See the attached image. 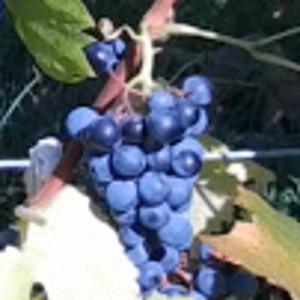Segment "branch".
<instances>
[{
	"mask_svg": "<svg viewBox=\"0 0 300 300\" xmlns=\"http://www.w3.org/2000/svg\"><path fill=\"white\" fill-rule=\"evenodd\" d=\"M175 12V0H152L122 58L95 94L94 106L99 112L108 113L114 108L116 93L124 91L142 67L140 50L143 42L149 40L153 46L156 38L168 29Z\"/></svg>",
	"mask_w": 300,
	"mask_h": 300,
	"instance_id": "30e6481e",
	"label": "branch"
},
{
	"mask_svg": "<svg viewBox=\"0 0 300 300\" xmlns=\"http://www.w3.org/2000/svg\"><path fill=\"white\" fill-rule=\"evenodd\" d=\"M84 154L85 147L78 141H70L65 145L60 162L31 200L34 209L42 210L48 205L62 183L75 171Z\"/></svg>",
	"mask_w": 300,
	"mask_h": 300,
	"instance_id": "325d2c04",
	"label": "branch"
}]
</instances>
